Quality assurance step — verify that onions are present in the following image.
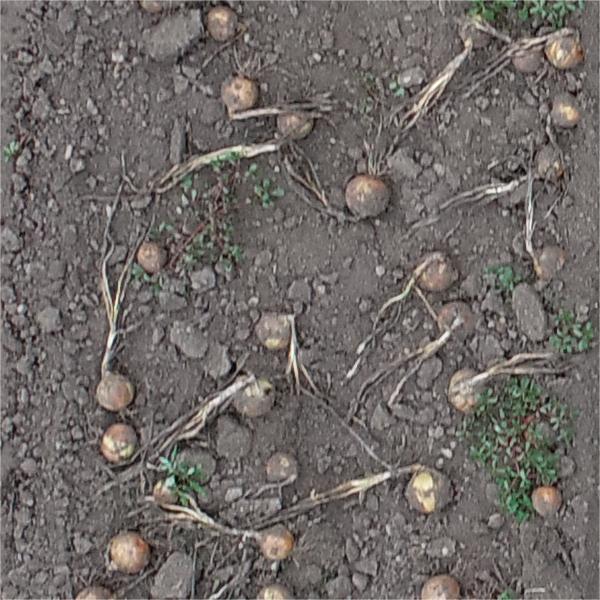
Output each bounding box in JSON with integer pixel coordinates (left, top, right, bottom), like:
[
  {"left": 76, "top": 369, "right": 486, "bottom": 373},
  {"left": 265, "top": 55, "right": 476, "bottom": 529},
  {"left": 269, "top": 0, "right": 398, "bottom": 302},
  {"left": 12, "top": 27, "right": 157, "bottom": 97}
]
[
  {"left": 258, "top": 526, "right": 292, "bottom": 560},
  {"left": 446, "top": 367, "right": 489, "bottom": 412},
  {"left": 262, "top": 452, "right": 295, "bottom": 483},
  {"left": 544, "top": 30, "right": 581, "bottom": 66},
  {"left": 281, "top": 109, "right": 310, "bottom": 140},
  {"left": 232, "top": 375, "right": 270, "bottom": 415},
  {"left": 531, "top": 484, "right": 562, "bottom": 514},
  {"left": 510, "top": 44, "right": 541, "bottom": 75},
  {"left": 151, "top": 478, "right": 179, "bottom": 505},
  {"left": 546, "top": 96, "right": 581, "bottom": 129},
  {"left": 533, "top": 145, "right": 563, "bottom": 179},
  {"left": 255, "top": 313, "right": 287, "bottom": 349},
  {"left": 78, "top": 585, "right": 115, "bottom": 600},
  {"left": 413, "top": 251, "right": 456, "bottom": 293},
  {"left": 421, "top": 572, "right": 460, "bottom": 599},
  {"left": 460, "top": 14, "right": 494, "bottom": 47},
  {"left": 220, "top": 74, "right": 256, "bottom": 111},
  {"left": 95, "top": 375, "right": 134, "bottom": 411},
  {"left": 529, "top": 242, "right": 565, "bottom": 278},
  {"left": 345, "top": 172, "right": 390, "bottom": 216},
  {"left": 135, "top": 240, "right": 165, "bottom": 272},
  {"left": 201, "top": 4, "right": 234, "bottom": 40},
  {"left": 403, "top": 468, "right": 449, "bottom": 514},
  {"left": 106, "top": 531, "right": 149, "bottom": 573},
  {"left": 256, "top": 582, "right": 291, "bottom": 599},
  {"left": 434, "top": 301, "right": 471, "bottom": 337},
  {"left": 97, "top": 422, "right": 136, "bottom": 463}
]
